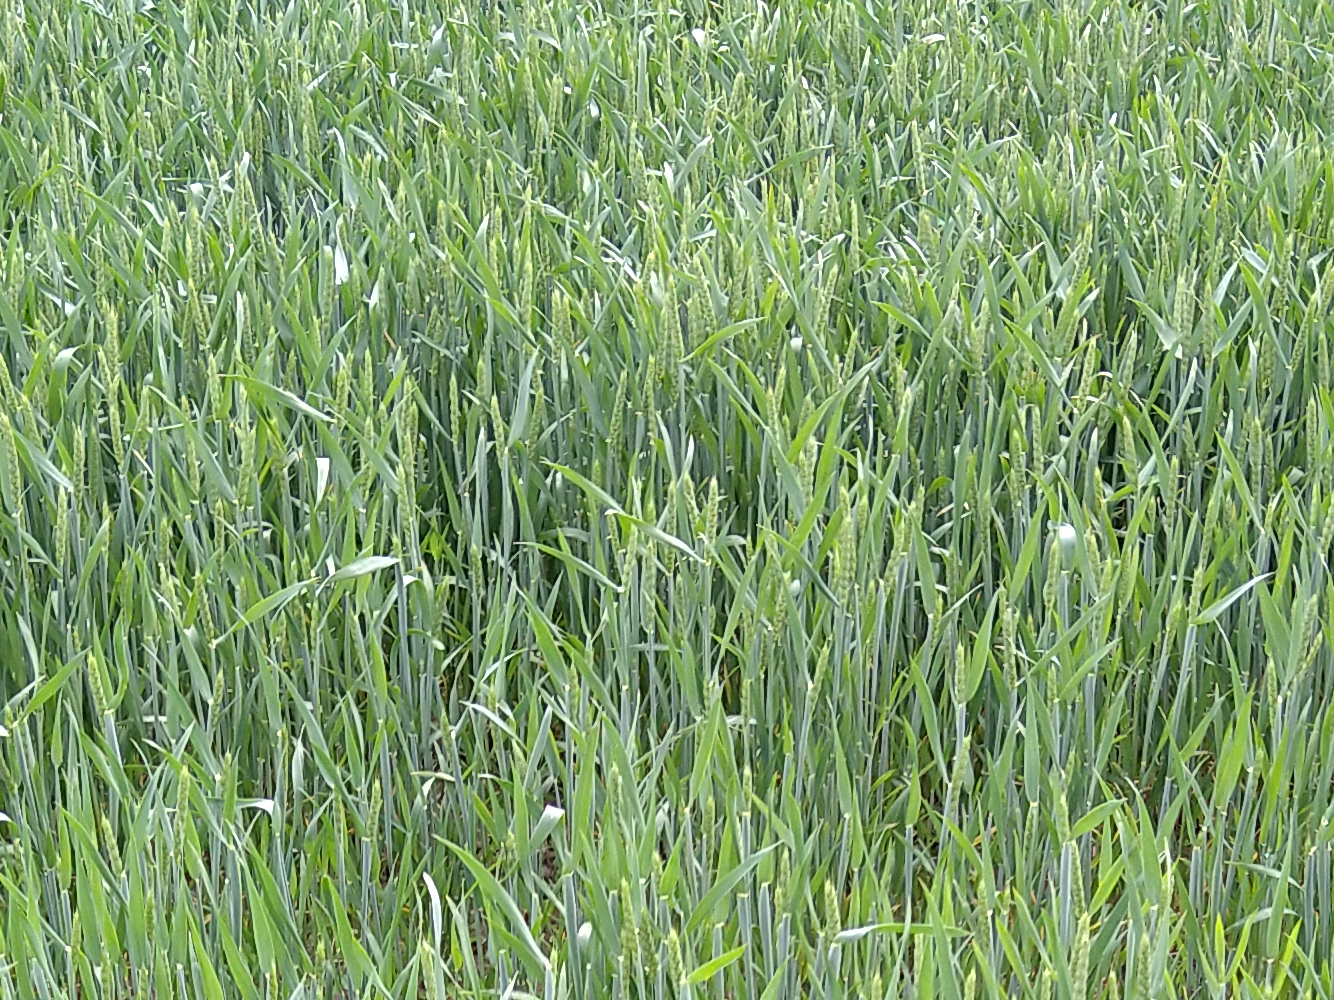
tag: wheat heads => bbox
[1250,746,1262,797]
[303,126,311,177]
[1056,795,1069,843]
[201,30,207,83]
[210,353,225,430]
[1068,922,1089,1000]
[582,292,598,331]
[1090,599,1110,637]
[93,235,101,311]
[681,185,687,228]
[303,88,318,156]
[964,306,979,376]
[667,486,675,567]
[1017,88,1030,141]
[1093,464,1101,514]
[1017,46,1028,82]
[276,610,287,650]
[417,13,426,62]
[564,663,578,736]
[822,188,835,234]
[998,582,1006,615]
[433,322,443,389]
[1317,262,1334,315]
[1247,416,1266,506]
[846,110,860,157]
[168,20,174,49]
[649,496,657,541]
[262,296,270,341]
[897,42,908,118]
[1086,126,1096,170]
[333,362,347,422]
[897,275,916,337]
[95,88,105,136]
[675,797,687,852]
[1259,333,1271,390]
[1305,476,1321,531]
[734,247,744,322]
[1240,276,1248,307]
[1330,687,1334,749]
[437,204,445,240]
[524,61,535,133]
[74,422,84,511]
[1305,394,1320,472]
[628,61,636,114]
[148,77,157,133]
[1048,50,1052,89]
[827,544,841,594]
[109,309,120,376]
[666,274,689,389]
[114,224,127,265]
[782,416,791,445]
[230,0,237,40]
[1064,748,1078,793]
[370,776,378,839]
[1288,268,1330,367]
[609,767,624,846]
[619,481,641,587]
[814,267,838,341]
[943,740,969,828]
[195,566,216,649]
[348,612,362,666]
[355,296,365,339]
[139,967,149,1000]
[768,555,783,593]
[803,455,814,508]
[513,238,532,278]
[174,765,188,874]
[916,481,926,532]
[216,35,222,86]
[920,213,934,261]
[1266,497,1273,541]
[9,240,19,318]
[169,197,183,237]
[209,669,223,731]
[291,41,297,99]
[1079,334,1097,410]
[1222,492,1241,563]
[1299,636,1318,694]
[762,514,773,556]
[352,151,370,225]
[187,207,200,275]
[698,17,707,73]
[541,229,550,272]
[160,95,174,145]
[758,626,768,672]
[1298,597,1320,656]
[1199,89,1208,125]
[414,218,437,285]
[705,676,714,723]
[88,648,107,725]
[1189,77,1200,120]
[1211,233,1222,287]
[800,112,808,150]
[532,117,544,169]
[947,47,957,83]
[619,871,642,975]
[675,572,690,622]
[620,938,629,1000]
[870,974,883,1000]
[1165,606,1178,663]
[669,932,680,991]
[682,472,699,532]
[945,283,958,333]
[1083,532,1103,591]
[484,158,493,210]
[292,563,303,628]
[102,955,109,1000]
[773,585,792,641]
[1030,402,1041,481]
[1044,535,1061,606]
[777,849,791,896]
[160,215,167,282]
[784,110,790,180]
[980,488,991,562]
[764,386,773,440]
[956,971,976,1000]
[490,391,505,465]
[187,279,207,354]
[420,947,456,1000]
[755,237,766,272]
[1178,416,1200,462]
[1091,19,1103,70]
[1235,416,1244,469]
[1065,64,1078,112]
[550,289,561,362]
[990,88,997,140]
[134,390,148,450]
[943,544,958,612]
[854,581,863,617]
[851,200,861,267]
[1189,571,1204,630]
[703,806,714,860]
[1318,472,1334,542]
[444,245,456,318]
[464,38,472,102]
[558,296,573,345]
[236,287,252,365]
[362,350,373,413]
[895,362,904,406]
[1124,415,1134,469]
[1063,133,1073,194]
[1215,181,1233,243]
[1324,585,1333,629]
[827,62,834,102]
[520,258,533,329]
[255,106,261,165]
[860,86,869,143]
[541,5,552,52]
[204,153,226,229]
[606,511,620,579]
[893,195,901,234]
[609,369,627,446]
[979,296,991,354]
[15,708,36,768]
[1036,7,1045,47]
[1114,9,1122,54]
[70,128,76,177]
[1089,96,1098,136]
[362,413,374,465]
[1096,262,1107,334]
[949,5,961,58]
[1044,137,1057,182]
[639,147,647,201]
[680,37,696,73]
[352,267,362,308]
[550,77,558,147]
[449,373,459,443]
[916,39,931,94]
[886,312,893,390]
[115,0,129,45]
[1170,189,1180,253]
[639,207,651,255]
[707,476,718,555]
[838,488,848,605]
[404,256,419,315]
[1181,643,1199,698]
[235,162,245,229]
[376,267,389,331]
[773,365,786,416]
[1061,307,1079,357]
[11,15,32,67]
[238,426,257,512]
[475,357,484,424]
[309,585,323,651]
[687,290,706,359]
[0,352,17,418]
[110,380,121,454]
[842,328,857,380]
[529,387,543,461]
[823,880,845,937]
[181,398,198,474]
[1265,658,1281,720]
[232,70,243,109]
[234,128,243,163]
[93,343,107,389]
[705,604,717,639]
[1119,545,1131,606]
[934,457,948,508]
[185,0,194,27]
[62,110,70,173]
[1204,278,1214,359]
[1015,208,1024,247]
[2,706,23,754]
[1132,9,1144,58]
[1069,838,1087,918]
[912,122,924,196]
[707,147,718,192]
[608,77,617,103]
[912,931,922,987]
[1001,88,1011,137]
[1026,611,1038,645]
[489,685,501,757]
[742,605,750,648]
[850,12,856,73]
[927,591,945,652]
[1201,499,1215,572]
[532,368,545,425]
[397,180,402,249]
[1239,190,1258,240]
[943,619,952,650]
[592,219,598,263]
[598,110,609,163]
[1260,0,1273,38]
[49,124,54,167]
[690,168,700,203]
[830,109,842,152]
[430,578,451,632]
[490,207,504,273]
[470,546,485,597]
[639,536,654,632]
[403,463,415,563]
[322,249,329,341]
[1108,967,1123,1000]
[1005,475,1017,522]
[886,509,903,592]
[160,828,167,898]
[313,944,324,1000]
[372,11,378,58]
[269,964,278,1000]
[266,13,273,51]
[696,713,706,758]
[1011,441,1027,511]
[804,642,832,721]
[210,123,224,167]
[1280,232,1293,321]
[402,375,412,436]
[703,105,710,143]
[608,141,615,187]
[1148,273,1159,318]
[650,178,663,230]
[956,643,964,690]
[213,500,225,571]
[47,67,60,118]
[1012,289,1020,334]
[407,403,419,450]
[769,329,782,363]
[1172,277,1186,332]
[0,734,19,803]
[1075,688,1080,763]
[378,401,389,438]
[335,791,343,851]
[746,92,754,136]
[166,53,180,101]
[639,356,654,443]
[242,173,266,257]
[1152,913,1164,956]
[242,35,256,94]
[443,91,463,137]
[729,71,744,109]
[0,62,13,126]
[421,137,434,221]
[635,902,654,973]
[583,96,590,132]
[774,888,788,937]
[1263,432,1274,498]
[1075,183,1086,223]
[1184,285,1196,334]
[1070,222,1093,297]
[102,814,124,889]
[157,523,172,576]
[1024,804,1035,882]
[847,519,855,590]
[967,484,976,527]
[1000,605,1016,680]
[0,414,20,515]
[1046,660,1055,725]
[1209,0,1219,52]
[799,392,812,428]
[496,57,508,118]
[441,714,456,790]
[89,426,111,500]
[639,252,654,293]
[745,270,755,338]
[702,70,715,96]
[912,382,925,446]
[849,500,872,552]
[1123,330,1136,395]
[782,193,789,237]
[1041,968,1053,1000]
[691,252,714,335]
[653,307,668,380]
[717,229,724,292]
[400,429,417,496]
[623,118,638,166]
[879,188,892,213]
[56,487,70,569]
[1279,502,1293,540]
[1295,180,1305,225]
[71,627,77,685]
[576,157,586,203]
[1135,928,1150,1000]
[739,676,748,729]
[976,908,994,949]
[958,54,976,112]
[142,112,154,154]
[1211,522,1229,548]
[1021,323,1032,393]
[552,174,568,212]
[260,40,276,94]
[12,838,25,889]
[1163,454,1177,532]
